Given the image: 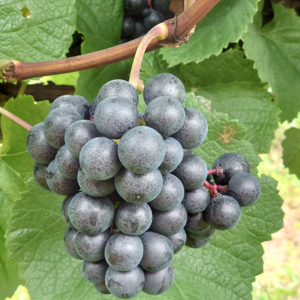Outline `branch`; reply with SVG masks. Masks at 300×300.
Masks as SVG:
<instances>
[{
	"instance_id": "branch-2",
	"label": "branch",
	"mask_w": 300,
	"mask_h": 300,
	"mask_svg": "<svg viewBox=\"0 0 300 300\" xmlns=\"http://www.w3.org/2000/svg\"><path fill=\"white\" fill-rule=\"evenodd\" d=\"M220 1L184 0V11L161 22L165 25L166 31L151 40L144 54L164 47L179 48L182 44H188L197 23Z\"/></svg>"
},
{
	"instance_id": "branch-1",
	"label": "branch",
	"mask_w": 300,
	"mask_h": 300,
	"mask_svg": "<svg viewBox=\"0 0 300 300\" xmlns=\"http://www.w3.org/2000/svg\"><path fill=\"white\" fill-rule=\"evenodd\" d=\"M143 36L104 50L60 60L16 61L0 59V83L17 85L20 80L99 68L134 58Z\"/></svg>"
}]
</instances>
